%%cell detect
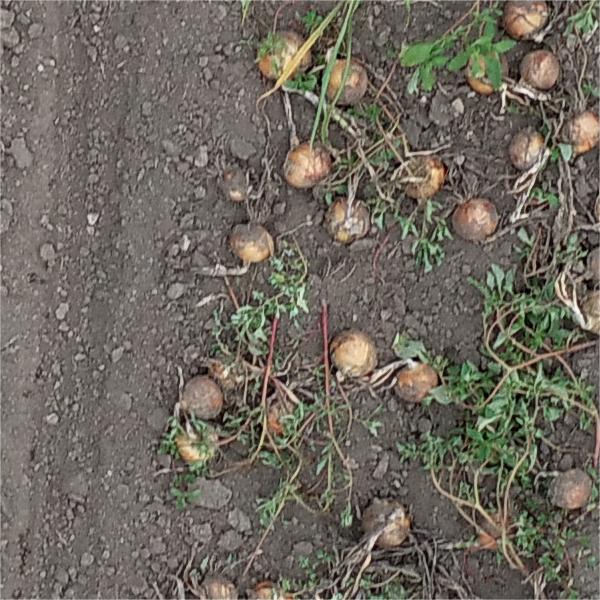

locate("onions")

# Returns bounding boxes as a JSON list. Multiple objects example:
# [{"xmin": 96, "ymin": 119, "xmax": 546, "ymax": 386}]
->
[
  {"xmin": 502, "ymin": 1, "xmax": 545, "ymax": 37},
  {"xmin": 229, "ymin": 223, "xmax": 272, "ymax": 263},
  {"xmin": 475, "ymin": 518, "xmax": 508, "ymax": 547},
  {"xmin": 330, "ymin": 329, "xmax": 376, "ymax": 374},
  {"xmin": 550, "ymin": 470, "xmax": 589, "ymax": 510},
  {"xmin": 463, "ymin": 52, "xmax": 502, "ymax": 91},
  {"xmin": 285, "ymin": 142, "xmax": 330, "ymax": 186},
  {"xmin": 362, "ymin": 501, "xmax": 407, "ymax": 545},
  {"xmin": 394, "ymin": 362, "xmax": 437, "ymax": 402},
  {"xmin": 450, "ymin": 196, "xmax": 495, "ymax": 239},
  {"xmin": 507, "ymin": 128, "xmax": 545, "ymax": 168},
  {"xmin": 576, "ymin": 287, "xmax": 600, "ymax": 331},
  {"xmin": 202, "ymin": 577, "xmax": 235, "ymax": 599},
  {"xmin": 214, "ymin": 351, "xmax": 245, "ymax": 386},
  {"xmin": 174, "ymin": 425, "xmax": 212, "ymax": 464},
  {"xmin": 181, "ymin": 379, "xmax": 222, "ymax": 420},
  {"xmin": 325, "ymin": 197, "xmax": 370, "ymax": 242},
  {"xmin": 520, "ymin": 50, "xmax": 559, "ymax": 89},
  {"xmin": 255, "ymin": 29, "xmax": 306, "ymax": 81},
  {"xmin": 217, "ymin": 166, "xmax": 249, "ymax": 199},
  {"xmin": 252, "ymin": 577, "xmax": 275, "ymax": 599},
  {"xmin": 262, "ymin": 407, "xmax": 288, "ymax": 437},
  {"xmin": 561, "ymin": 110, "xmax": 599, "ymax": 152},
  {"xmin": 322, "ymin": 59, "xmax": 366, "ymax": 103},
  {"xmin": 407, "ymin": 156, "xmax": 443, "ymax": 199}
]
